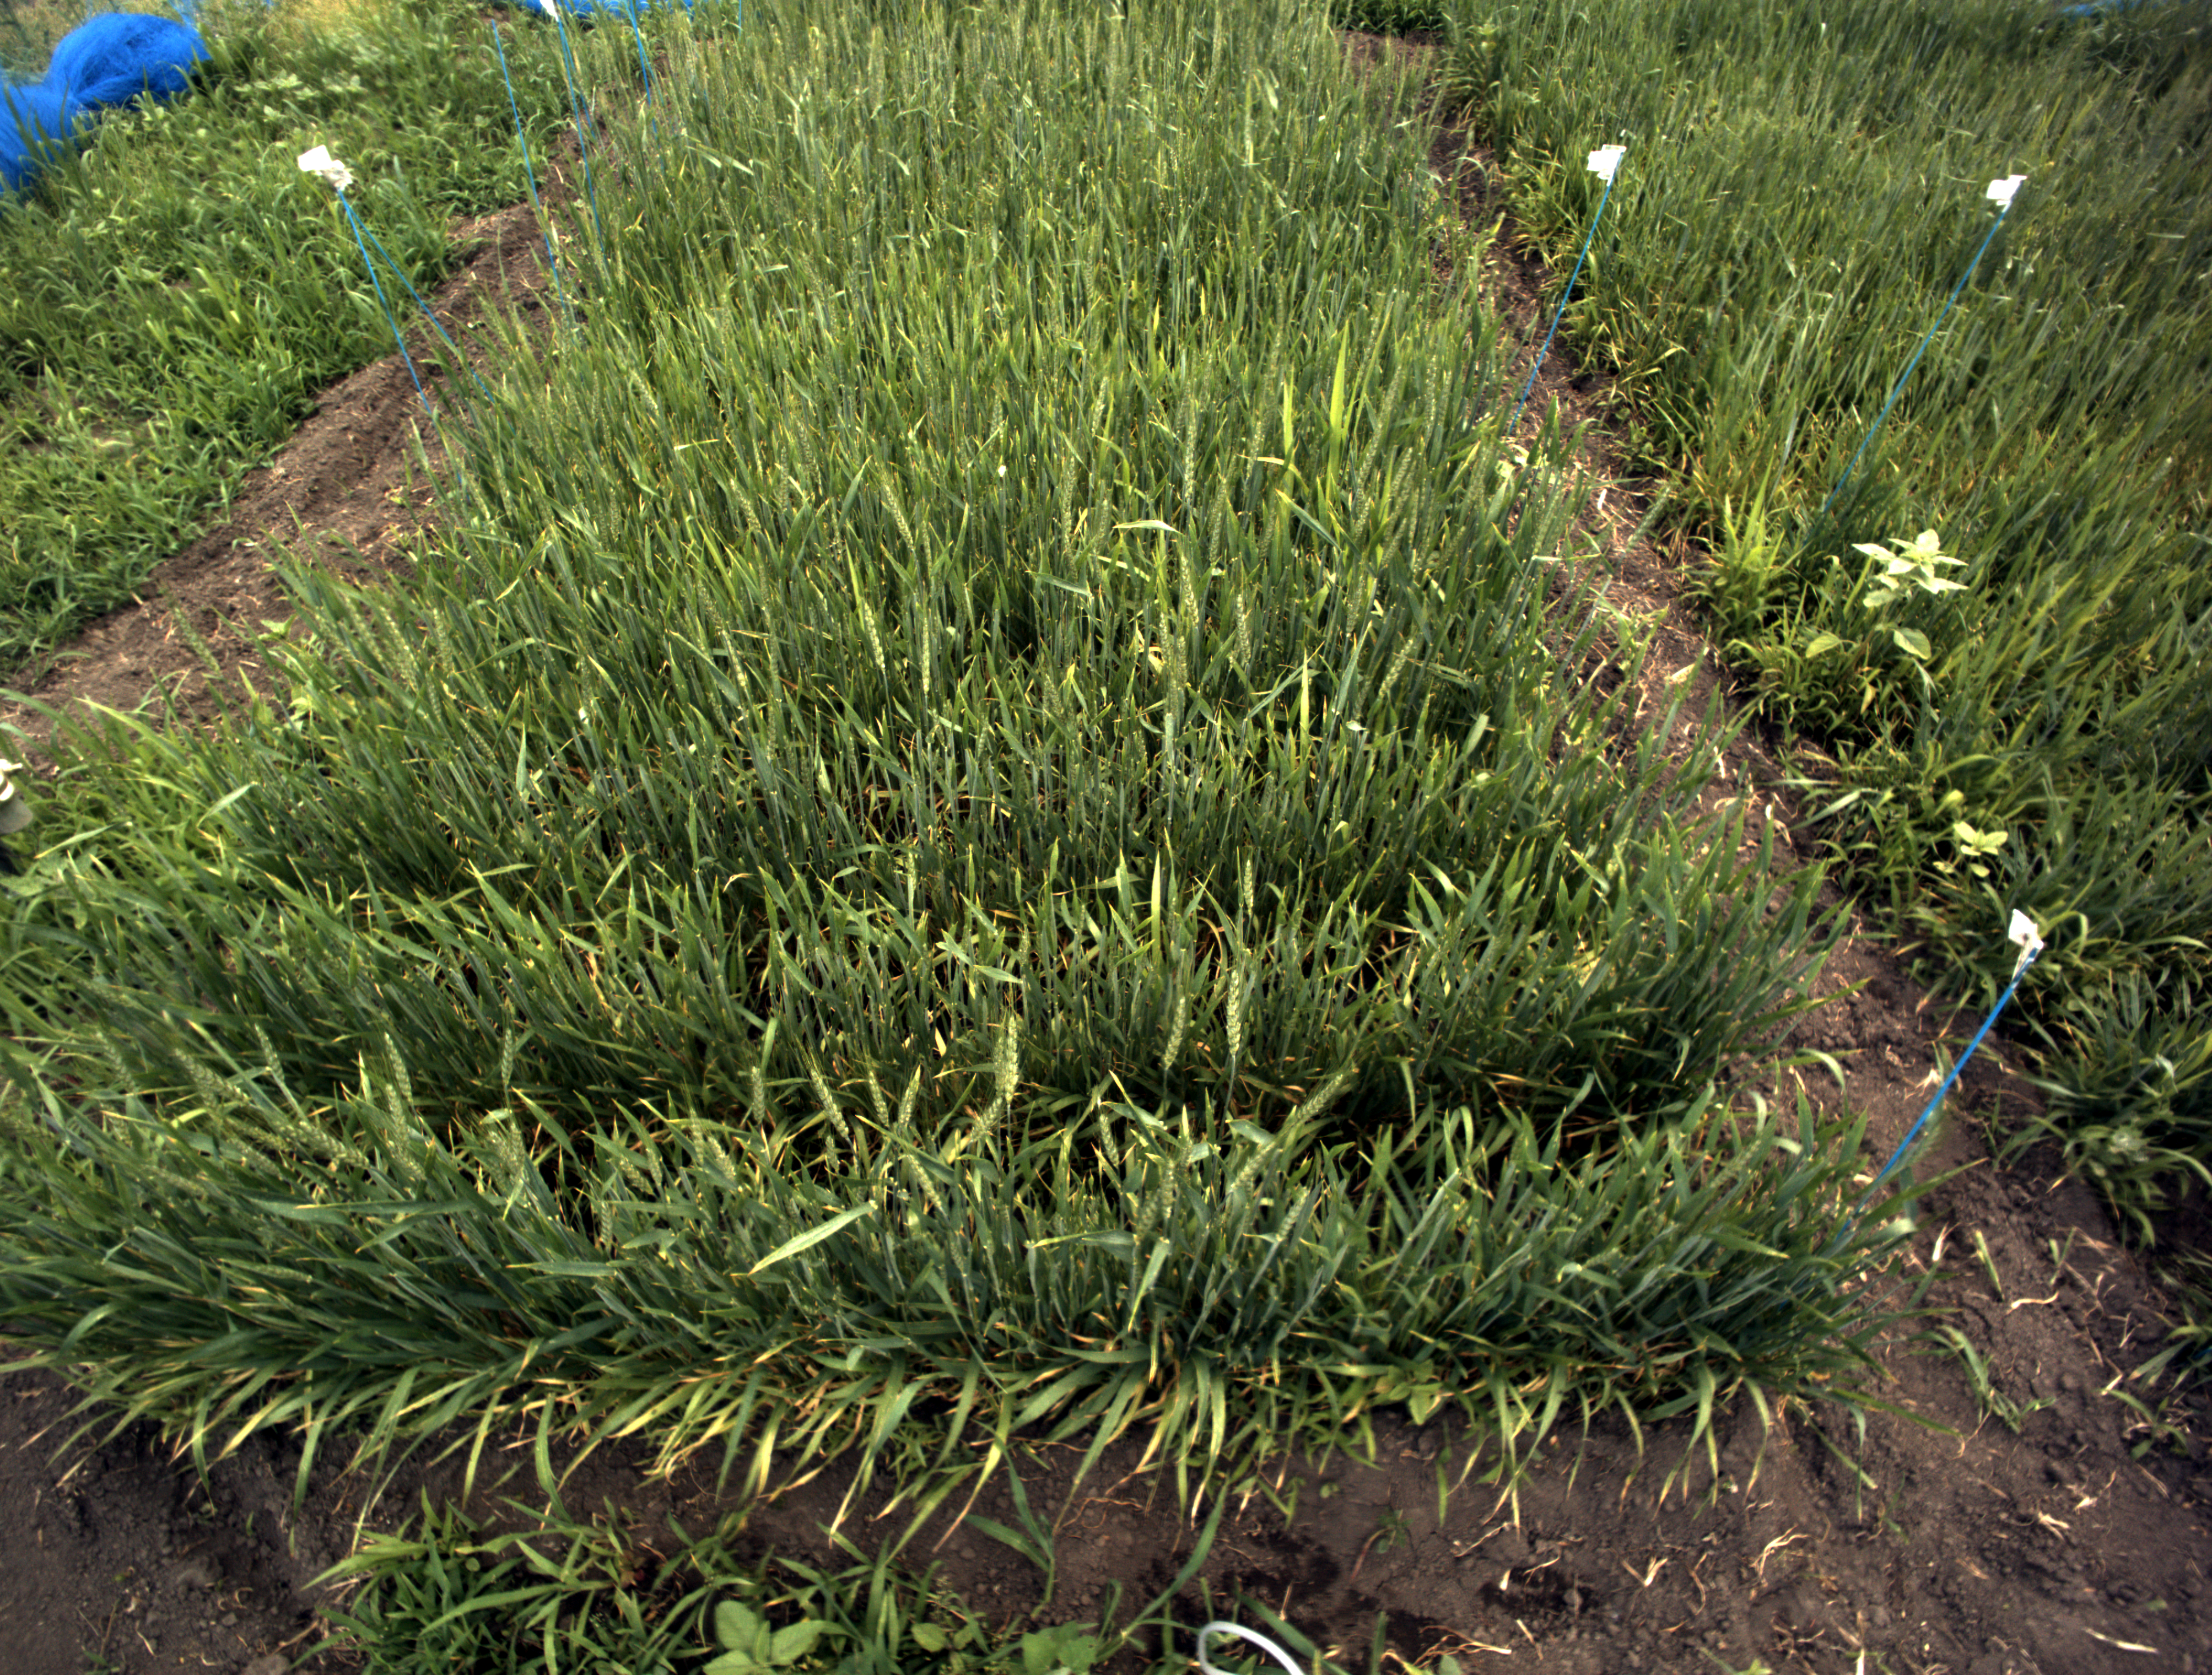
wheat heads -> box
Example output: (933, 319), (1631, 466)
(678, 322), (687, 337)
(913, 62), (919, 96)
(1067, 748), (1077, 781)
(1017, 937), (1031, 966)
(1307, 487), (1313, 505)
(1034, 745), (1041, 775)
(1117, 393), (1126, 432)
(1180, 553), (1200, 625)
(1037, 81), (1046, 109)
(168, 899), (199, 939)
(1063, 531), (1079, 582)
(1175, 381), (1190, 435)
(816, 594), (829, 619)
(787, 65), (798, 88)
(578, 463), (591, 489)
(1289, 1007), (1300, 1032)
(1268, 331), (1280, 377)
(1173, 912), (1180, 937)
(678, 30), (687, 63)
(1609, 81), (1616, 99)
(977, 715), (990, 756)
(872, 1002), (879, 1022)
(1050, 298), (1062, 345)
(772, 349), (780, 378)
(1167, 897), (1177, 939)
(1133, 1257), (1141, 1284)
(1056, 156), (1069, 182)
(1288, 153), (1296, 178)
(252, 1265), (308, 1280)
(1437, 371), (1453, 426)
(716, 190), (736, 229)
(1196, 496), (1202, 524)
(1095, 319), (1100, 344)
(995, 1195), (1012, 1221)
(919, 520), (934, 578)
(923, 334), (933, 384)
(385, 1083), (410, 1157)
(1083, 362), (1090, 390)
(1330, 66), (1336, 92)
(598, 503), (610, 552)
(836, 228), (845, 255)
(708, 689), (728, 730)
(1053, 346), (1059, 390)
(1113, 597), (1124, 631)
(899, 77), (910, 102)
(1200, 38), (1223, 113)
(251, 754), (274, 783)
(873, 41), (887, 73)
(590, 371), (601, 420)
(881, 481), (915, 550)
(1357, 423), (1383, 487)
(1297, 142), (1304, 162)
(753, 47), (762, 84)
(458, 716), (498, 763)
(1921, 67), (1941, 97)
(2011, 88), (2021, 107)
(322, 946), (348, 976)
(173, 606), (221, 676)
(1481, 290), (1491, 333)
(857, 938), (869, 964)
(1462, 924), (1475, 955)
(519, 410), (545, 461)
(1421, 487), (1435, 544)
(809, 204), (818, 232)
(1435, 939), (1449, 963)
(684, 34), (697, 79)
(809, 148), (817, 183)
(682, 587), (698, 617)
(1233, 233), (1241, 253)
(1359, 127), (1367, 158)
(994, 1035), (1006, 1101)
(1134, 27), (1144, 65)
(486, 1128), (521, 1174)
(1187, 81), (1196, 117)
(1887, 87), (1899, 114)
(949, 1238), (964, 1273)
(1066, 697), (1076, 724)
(1489, 908), (1512, 953)
(1583, 522), (1613, 567)
(1137, 727), (1147, 758)
(1657, 945), (1683, 978)
(470, 671), (487, 701)
(682, 74), (690, 96)
(1510, 1132), (1525, 1162)
(1329, 104), (1337, 129)
(1083, 759), (1093, 786)
(1276, 26), (1285, 77)
(1211, 364), (1223, 406)
(1377, 638), (1414, 700)
(913, 200), (921, 227)
(478, 295), (515, 354)
(740, 585), (750, 621)
(626, 127), (645, 170)
(1585, 1247), (1620, 1271)
(1274, 1), (1296, 43)
(1247, 257), (1254, 282)
(1415, 56), (1426, 83)
(933, 616), (939, 639)
(1036, 45), (1051, 97)
(533, 737), (548, 770)
(1113, 241), (1121, 270)
(1291, 1073), (1343, 1129)
(1418, 477), (1427, 511)
(1235, 267), (1243, 291)
(1287, 187), (1297, 223)
(1379, 517), (1407, 568)
(553, 945), (571, 976)
(1313, 352), (1321, 386)
(913, 768), (922, 800)
(1313, 921), (1322, 956)
(841, 17), (855, 58)
(769, 182), (780, 209)
(653, 167), (671, 200)
(1258, 506), (1275, 562)
(1799, 119), (1810, 136)
(1366, 123), (1377, 155)
(812, 374), (823, 410)
(123, 932), (165, 966)
(1043, 157), (1054, 192)
(610, 92), (621, 119)
(1029, 500), (1036, 526)
(424, 668), (443, 722)
(885, 1230), (896, 1251)
(1283, 565), (1291, 598)
(1702, 69), (1715, 116)
(1229, 626), (1253, 669)
(664, 148), (679, 179)
(1307, 178), (1314, 196)
(702, 739), (715, 773)
(509, 1119), (527, 1170)
(854, 1185), (866, 1205)
(1063, 635), (1069, 662)
(189, 1068), (224, 1124)
(851, 236), (859, 303)
(2148, 455), (2173, 486)
(627, 1248), (653, 1272)
(612, 337), (622, 358)
(1354, 190), (1364, 215)
(458, 728), (475, 762)
(970, 1097), (1003, 1142)
(1827, 76), (1836, 102)
(1236, 593), (1253, 665)
(1938, 71), (1956, 99)
(1066, 150), (1080, 184)
(934, 197), (947, 216)
(749, 1063), (767, 1124)
(932, 748), (939, 777)
(775, 38), (785, 68)
(1093, 498), (1109, 553)
(1697, 955), (1720, 988)
(1334, 916), (1341, 941)
(444, 947), (462, 974)
(1595, 1202), (1613, 1228)
(795, 208), (808, 220)
(1605, 817), (1633, 878)
(2021, 112), (2037, 137)
(1149, 43), (1154, 75)
(2108, 89), (2132, 125)
(972, 499), (976, 537)
(222, 1161), (245, 1186)
(384, 1136), (428, 1181)
(1345, 347), (1357, 379)
(1208, 511), (1223, 564)
(1804, 57), (1823, 103)
(1265, 775), (1276, 804)
(977, 497), (983, 529)
(1309, 85), (1315, 111)
(715, 743), (724, 776)
(940, 699), (951, 736)
(936, 1259), (947, 1282)
(482, 689), (495, 720)
(1246, 38), (1256, 80)
(890, 285), (899, 305)
(1900, 1107), (1943, 1170)
(1041, 354), (1051, 385)
(1380, 364), (1402, 421)
(629, 79), (639, 122)
(1230, 1140), (1277, 1189)
(1424, 354), (1438, 432)
(977, 954), (984, 982)
(540, 495), (556, 522)
(1289, 17), (1307, 62)
(1532, 489), (1566, 557)
(1143, 1189), (1152, 1212)
(1392, 56), (1396, 81)
(715, 65), (731, 106)
(696, 636), (717, 685)
(838, 934), (852, 964)
(378, 606), (420, 672)
(592, 237), (604, 271)
(1208, 478), (1228, 537)
(1400, 55), (1405, 85)
(1166, 678), (1179, 719)
(2053, 108), (2069, 134)
(734, 93), (742, 121)
(590, 561), (604, 590)
(951, 303), (960, 356)
(572, 72), (592, 108)
(989, 394), (997, 449)
(930, 705), (945, 747)
(975, 27), (982, 66)
(1094, 1195), (1100, 1213)
(1077, 789), (1084, 814)
(2034, 156), (2060, 204)
(644, 1149), (662, 1183)
(2020, 105), (2037, 128)
(937, 32), (949, 65)
(1025, 730), (1033, 757)
(1056, 25), (1061, 58)
(1091, 377), (1108, 433)
(1379, 172), (1385, 195)
(822, 348), (838, 384)
(924, 1128), (935, 1155)
(143, 1162), (207, 1199)
(1022, 188), (1027, 210)
(380, 636), (409, 680)
(1580, 1151), (1595, 1180)
(829, 513), (843, 560)
(601, 50), (612, 85)
(616, 1152), (654, 1196)
(1948, 72), (1962, 100)
(724, 637), (747, 687)
(1341, 43), (1355, 85)
(777, 1213), (790, 1237)
(827, 302), (839, 337)
(1381, 459), (1417, 543)
(941, 110), (950, 135)
(765, 90), (777, 120)
(955, 592), (969, 628)
(1001, 28), (1014, 82)
(91, 1028), (141, 1098)
(1350, 680), (1371, 721)
(532, 492), (555, 540)
(1669, 91), (1680, 123)
(1178, 184), (1183, 205)
(1476, 481), (1485, 509)
(905, 1153), (941, 1204)
(963, 51), (970, 84)
(504, 750), (516, 782)
(1304, 113), (1308, 150)
(1236, 17), (1245, 67)
(1674, 876), (1695, 909)
(1181, 410), (1197, 500)
(1042, 688), (1049, 728)
(809, 1063), (851, 1137)
(961, 923), (970, 950)
(1175, 635), (1188, 691)
(226, 735), (259, 784)
(659, 332), (668, 350)
(830, 23), (839, 55)
(1498, 576), (1514, 612)
(0, 1112), (56, 1140)
(858, 69), (864, 91)
(630, 371), (659, 411)
(460, 463), (491, 520)
(1090, 547), (1106, 591)
(254, 1023), (284, 1081)
(1169, 147), (1178, 174)
(1269, 601), (1278, 629)
(801, 251), (826, 306)
(709, 70), (720, 116)
(1535, 513), (1566, 578)
(663, 34), (675, 73)
(472, 546), (503, 594)
(270, 1118), (311, 1146)
(471, 944), (491, 977)
(1677, 944), (1705, 977)
(1077, 903), (1086, 936)
(619, 40), (630, 79)
(696, 578), (725, 631)
(1731, 137), (1742, 165)
(879, 151), (885, 182)
(1226, 970), (1242, 1056)
(550, 982), (565, 1007)
(726, 606), (737, 634)
(800, 754), (812, 798)
(1317, 51), (1330, 94)
(1106, 946), (1115, 976)
(1160, 187), (1170, 209)
(1391, 75), (1405, 118)
(1962, 94), (1976, 114)
(958, 436), (969, 474)
(549, 415), (565, 452)
(784, 352), (790, 385)
(229, 1138), (281, 1177)
(1436, 1193), (1454, 1223)
(783, 733), (796, 775)
(299, 1120), (369, 1171)
(809, 600), (818, 625)
(1408, 487), (1420, 548)
(1108, 31), (1118, 64)
(800, 1304), (820, 1316)
(1010, 26), (1018, 48)
(1356, 64), (1366, 98)
(1262, 391), (1276, 437)
(1104, 625), (1112, 657)
(69, 972), (136, 1005)
(1014, 760), (1031, 795)
(868, 72), (882, 109)
(1412, 536), (1431, 575)
(527, 373), (550, 424)
(1715, 92), (1728, 121)
(796, 908), (817, 961)
(824, 1135), (841, 1171)
(983, 224), (990, 243)
(1288, 595), (1295, 625)
(1189, 350), (1196, 397)
(410, 444), (434, 485)
(922, 32), (933, 61)
(868, 1069), (890, 1127)
(1032, 588), (1040, 622)
(1782, 85), (1796, 115)
(678, 84), (693, 121)
(784, 19), (797, 61)
(768, 706), (777, 759)
(1385, 37), (1393, 89)
(863, 602), (885, 671)
(807, 316), (816, 336)
(1306, 19), (1318, 57)
(1172, 44), (1178, 66)
(907, 851), (917, 891)
(1358, 321), (1379, 384)
(740, 112), (752, 144)
(1206, 91), (1216, 117)
(1185, 31), (1193, 61)
(1353, 497), (1371, 540)
(1567, 0), (1575, 22)
(1358, 1009), (1375, 1034)
(1427, 89), (1442, 123)
(1275, 296), (1285, 334)
(1243, 1178), (1253, 1205)
(98, 1097), (134, 1148)
(787, 1279), (797, 1297)
(1157, 611), (1171, 667)
(948, 19), (957, 57)
(599, 410), (612, 449)
(383, 1030), (414, 1100)
(834, 617), (842, 647)
(1416, 70), (1427, 97)
(847, 734), (858, 775)
(1241, 1207), (1252, 1232)
(956, 363), (960, 387)
(1387, 447), (1412, 504)
(560, 307), (573, 371)
(1046, 1282), (1059, 1300)
(1083, 25), (1090, 76)
(821, 163), (839, 193)
(493, 453), (513, 520)
(1179, 1135), (1195, 1172)
(972, 37), (976, 54)
(552, 741), (568, 772)
(878, 938), (889, 969)
(482, 1153), (507, 1194)
(1981, 122), (1999, 161)
(1325, 88), (1331, 112)
(917, 38), (925, 74)
(1321, 356), (1333, 391)
(608, 486), (620, 542)
(336, 588), (385, 663)
(898, 1079), (918, 1127)
(1236, 739), (1249, 776)
(793, 416), (823, 486)
(838, 358), (846, 383)
(1736, 228), (1751, 258)
(1874, 34), (1886, 59)
(1272, 178), (1280, 210)
(1212, 11), (1219, 48)
(1346, 575), (1369, 633)
(1452, 909), (1465, 946)
(827, 214), (832, 241)
(580, 623), (596, 656)
(1150, 4), (1161, 43)
(750, 317), (759, 342)
(929, 53), (935, 84)
(1934, 157), (1951, 204)
(1097, 1111), (1121, 1168)
(601, 1200), (612, 1248)
(1358, 943), (1370, 965)
(1036, 9), (1049, 40)
(501, 1025), (514, 1087)
(752, 358), (767, 390)
(850, 165), (866, 204)
(1707, 1140), (1761, 1188)
(578, 654), (596, 719)
(1750, 120), (1761, 142)
(1053, 1210), (1062, 1233)
(1121, 30), (1128, 70)
(1178, 127), (1184, 163)
(1432, 526), (1465, 574)
(563, 75), (575, 111)
(768, 630), (779, 684)
(730, 477), (738, 497)
(1245, 113), (1252, 151)
(1005, 1014), (1019, 1106)
(565, 381), (582, 418)
(729, 356), (735, 387)
(403, 657), (419, 695)
(1226, 454), (1238, 486)
(1118, 494), (1124, 514)
(1121, 694), (1129, 720)
(573, 50), (585, 79)
(1766, 126), (1774, 146)
(1130, 755), (1136, 777)
(705, 1137), (735, 1182)
(953, 376), (962, 402)
(1295, 898), (1305, 926)
(1174, 4), (1184, 51)
(1332, 356), (1337, 385)
(1162, 995), (1187, 1070)
(1853, 92), (1870, 121)
(1030, 50), (1040, 99)
(173, 1048), (250, 1107)
(1200, 169), (1207, 202)
(668, 80), (683, 119)
(1159, 161), (1167, 190)
(515, 607), (532, 635)
(931, 467), (937, 499)
(430, 605), (456, 677)
(850, 394), (857, 413)
(2034, 107), (2046, 129)
(845, 267), (855, 292)
(1061, 455), (1076, 535)
(184, 959), (207, 982)
(1309, 434), (1319, 476)
(1010, 727), (1019, 760)
(951, 1002), (957, 1029)
(1098, 179), (1103, 206)
(738, 89), (755, 114)
(1035, 370), (1045, 404)
(650, 78), (660, 110)
(1041, 301), (1047, 319)
(617, 250), (626, 285)
(1247, 420), (1263, 477)
(1294, 62), (1301, 90)
(687, 1106), (707, 1164)
(1092, 698), (1097, 721)
(1315, 965), (1321, 984)
(921, 616), (931, 695)
(1199, 353), (1213, 408)
(1307, 38), (1325, 91)
(1044, 672), (1068, 727)
(570, 438), (583, 478)
(563, 938), (585, 971)
(1415, 394), (1426, 416)
(1520, 897), (1541, 950)
(1137, 1187), (1163, 1239)
(1107, 64), (1121, 99)
(1750, 205), (1763, 241)
(289, 936), (306, 975)
(1183, 155), (1192, 187)
(1740, 108), (1750, 130)
(936, 568), (943, 591)
(986, 1238), (995, 1258)
(728, 320), (733, 334)
(699, 56), (707, 92)
(756, 562), (772, 608)
(842, 611), (851, 642)
(592, 45), (602, 80)
(1067, 588), (1075, 622)
(853, 438), (861, 469)
(1047, 9), (1057, 42)
(1244, 860), (1254, 910)
(752, 438), (764, 481)
(1012, 18), (1019, 62)
(996, 29), (1007, 68)
(735, 488), (763, 530)
(554, 960), (574, 992)
(226, 1117), (294, 1152)
(1626, 485), (1672, 553)
(721, 294), (729, 344)
(1082, 266), (1087, 286)
(304, 947), (329, 972)
(904, 189), (913, 217)
(998, 399), (1005, 441)
(1838, 116), (1860, 152)
(1218, 284), (1226, 310)
(866, 723), (877, 756)
(784, 1192), (801, 1223)
(506, 304), (530, 353)
(1086, 244), (1095, 302)
(316, 614), (360, 670)
(1354, 486), (1366, 517)
(1467, 441), (1494, 507)
(853, 89), (863, 130)
(776, 446), (789, 515)
(1620, 87), (1632, 112)
(673, 47), (681, 75)
(724, 55), (741, 87)
(1035, 932), (1044, 961)
(1092, 8), (1100, 60)
(671, 607), (693, 638)
(923, 942), (930, 970)
(1279, 1189), (1309, 1235)
(1161, 1158), (1176, 1220)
